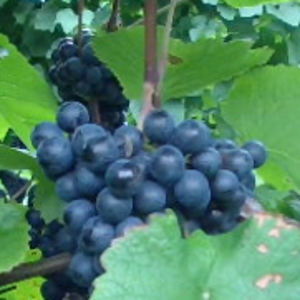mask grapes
<instances>
[{
	"label": "grapes",
	"mask_w": 300,
	"mask_h": 300,
	"mask_svg": "<svg viewBox=\"0 0 300 300\" xmlns=\"http://www.w3.org/2000/svg\"><path fill=\"white\" fill-rule=\"evenodd\" d=\"M55 115L35 125L31 144L66 203L64 224L77 245L69 276L82 288L104 273L100 254L110 242L126 228L147 226L150 215L173 210L183 239L197 229L230 234L254 190L252 169L270 156L261 140L215 138L202 119L177 123L166 109H153L143 130L114 132L90 121L80 99L65 100Z\"/></svg>",
	"instance_id": "1"
}]
</instances>
